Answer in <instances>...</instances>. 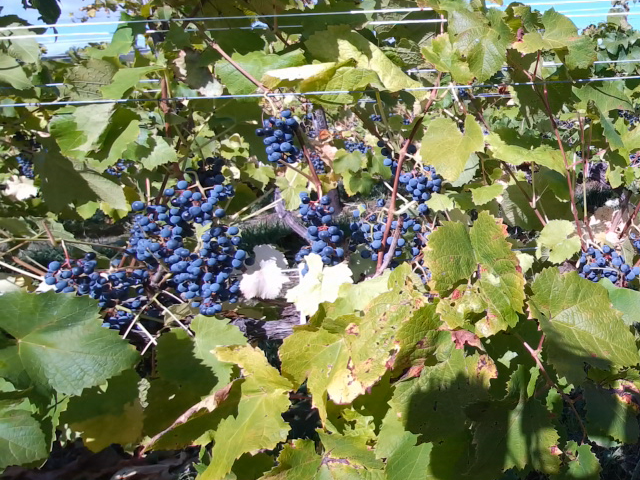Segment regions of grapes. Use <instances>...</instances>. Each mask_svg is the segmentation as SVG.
Segmentation results:
<instances>
[{"instance_id": "01657485", "label": "grapes", "mask_w": 640, "mask_h": 480, "mask_svg": "<svg viewBox=\"0 0 640 480\" xmlns=\"http://www.w3.org/2000/svg\"><path fill=\"white\" fill-rule=\"evenodd\" d=\"M207 165H212V170H204L203 161H198L199 168L196 174L199 177L201 187H212L206 190V200L194 207L190 202H200L202 193L199 188L195 192L187 191L188 183L186 180H178L175 188H166L163 191L165 198H172L176 194V190H184L180 197H174L171 205L176 208H170L168 205H149L146 217L139 214L135 217V224L130 230L133 235L129 239L132 247L125 249L124 255L135 257L137 262L146 261L149 269H155L158 266V260L166 263L168 271L173 273L166 281V285L175 288L177 293H185L187 300L195 297H201L204 302L195 301L192 304L194 309L199 308L202 315L213 317L215 313H220L223 305L218 302L210 301L213 293H218L220 301L225 303L228 299L230 304H235L240 296V282L235 280L226 288V280L233 268H241L244 263L247 266H253L255 260L252 257L246 258V251L243 248L235 249V246L242 244V238L235 236L239 229L237 227L225 226L213 227L206 230L202 235V248L199 255L191 252L187 247L183 246L182 233L184 228L179 225L181 221H194L195 223L205 227L213 222L214 204L219 200L226 201L227 197L234 195V188L230 184L222 185L224 175L222 174V166L225 165L223 158L214 159L209 156L205 159ZM215 217L223 219L226 211L222 208L214 210ZM143 232L152 233L154 236L169 239L165 242V246L161 243L153 242L149 238H145ZM204 258L208 271L201 275L202 285L200 286L197 279L200 277L201 269L199 268Z\"/></svg>"}, {"instance_id": "b958b902", "label": "grapes", "mask_w": 640, "mask_h": 480, "mask_svg": "<svg viewBox=\"0 0 640 480\" xmlns=\"http://www.w3.org/2000/svg\"><path fill=\"white\" fill-rule=\"evenodd\" d=\"M97 254L94 251H87L84 255V259H78L75 265L71 267V270H62L60 277L65 280H60L53 276V274L61 267V263L58 260H52L47 266V274L45 275L44 282L47 286H53L56 284V290L63 294H70L76 291L79 295L89 293L92 299H99L98 305L103 307L106 304V299L124 298L129 294V287L132 285L140 284L135 292L138 296H142L145 289L142 285H145L148 280V272L144 268H136L131 272V276H127L125 271H115L108 274V283L112 285L109 288L107 285V279L101 277L99 272H93L97 266Z\"/></svg>"}, {"instance_id": "0513c4c2", "label": "grapes", "mask_w": 640, "mask_h": 480, "mask_svg": "<svg viewBox=\"0 0 640 480\" xmlns=\"http://www.w3.org/2000/svg\"><path fill=\"white\" fill-rule=\"evenodd\" d=\"M299 198L301 199V203L298 204L300 208L299 214L302 216L304 222L311 221L310 226L307 228V238L312 240L313 243L312 247L309 248L307 245L301 246L299 251L295 253L294 260L301 262L304 256L313 252L315 256H320V259L325 265H338L340 263L338 257L344 256V248L337 247L333 249L331 246H328V242L338 243L340 238L344 236V231L339 229L336 224L329 225L327 231H318L316 227L321 224L331 223L332 216L335 214V208L333 206H327L324 210L323 207H320L330 205L332 203L331 197L329 195L322 196L319 200L320 206H317L315 211L313 207L309 206L311 198L307 192L301 191Z\"/></svg>"}, {"instance_id": "84f90ec7", "label": "grapes", "mask_w": 640, "mask_h": 480, "mask_svg": "<svg viewBox=\"0 0 640 480\" xmlns=\"http://www.w3.org/2000/svg\"><path fill=\"white\" fill-rule=\"evenodd\" d=\"M282 118L269 117L262 121V127L255 129V135L257 137H264L262 144L267 146L265 152L268 155L267 161L269 163H277L279 167H284L279 162L280 159L286 163H295L300 153V148L293 144V138L295 133L293 128L297 127V122L294 117H291V111L284 109L281 111Z\"/></svg>"}, {"instance_id": "f8a65327", "label": "grapes", "mask_w": 640, "mask_h": 480, "mask_svg": "<svg viewBox=\"0 0 640 480\" xmlns=\"http://www.w3.org/2000/svg\"><path fill=\"white\" fill-rule=\"evenodd\" d=\"M423 169L430 171L432 181L429 180L428 176L421 175L420 177L414 178L412 173L401 172L399 174V182L405 184L404 190L413 195L411 200L418 202L419 214L421 216H427L430 214V210L424 202L431 199V194L426 191V189L431 188L432 192H439L441 190L442 179L440 175H437V170L433 166L424 165Z\"/></svg>"}, {"instance_id": "5460f4e3", "label": "grapes", "mask_w": 640, "mask_h": 480, "mask_svg": "<svg viewBox=\"0 0 640 480\" xmlns=\"http://www.w3.org/2000/svg\"><path fill=\"white\" fill-rule=\"evenodd\" d=\"M587 254L593 255L595 262H591L589 264H584L582 270L579 272V275L582 278H586L587 274L588 279L592 280L593 283H598L599 278L596 275V271L592 270L594 267H606L607 266V255H610L611 264L620 268V273L624 275L625 281H633L640 274L639 266H630L628 263H625V259L622 255L617 254V250L615 248H611L609 245H603L600 249H595L593 246H589L587 248Z\"/></svg>"}, {"instance_id": "83cd7487", "label": "grapes", "mask_w": 640, "mask_h": 480, "mask_svg": "<svg viewBox=\"0 0 640 480\" xmlns=\"http://www.w3.org/2000/svg\"><path fill=\"white\" fill-rule=\"evenodd\" d=\"M387 216H384L382 219L383 223H386ZM376 223L373 226V242L369 241L366 238L370 237V225L368 222H364L363 220L350 222L349 230L352 231L351 237L352 240L349 244V250L351 252H355L357 250V245L364 243L368 246L369 249L375 250L381 248V237L383 234V230L385 228V224Z\"/></svg>"}, {"instance_id": "e5b3c951", "label": "grapes", "mask_w": 640, "mask_h": 480, "mask_svg": "<svg viewBox=\"0 0 640 480\" xmlns=\"http://www.w3.org/2000/svg\"><path fill=\"white\" fill-rule=\"evenodd\" d=\"M133 319V314L130 311L119 310L117 312V316H110L108 321H104L102 326L104 328H110L114 330H118L120 325H124L126 322H129Z\"/></svg>"}, {"instance_id": "2adb6a1f", "label": "grapes", "mask_w": 640, "mask_h": 480, "mask_svg": "<svg viewBox=\"0 0 640 480\" xmlns=\"http://www.w3.org/2000/svg\"><path fill=\"white\" fill-rule=\"evenodd\" d=\"M377 146L381 149V154L383 156H386L387 159L383 160V166L384 167H391V176L394 177V169L395 166L397 164V161H394L392 155H391V148L390 147H384L385 143L383 141H378L377 142Z\"/></svg>"}, {"instance_id": "ef6de9ee", "label": "grapes", "mask_w": 640, "mask_h": 480, "mask_svg": "<svg viewBox=\"0 0 640 480\" xmlns=\"http://www.w3.org/2000/svg\"><path fill=\"white\" fill-rule=\"evenodd\" d=\"M403 224L401 226V234L405 235L407 233V230L409 229V227H412V230L414 232H419L421 230V225L419 222H417L416 219H410V215L409 214H405L403 216Z\"/></svg>"}, {"instance_id": "1ff8f66d", "label": "grapes", "mask_w": 640, "mask_h": 480, "mask_svg": "<svg viewBox=\"0 0 640 480\" xmlns=\"http://www.w3.org/2000/svg\"><path fill=\"white\" fill-rule=\"evenodd\" d=\"M360 256L362 259H370L372 262H376L378 257V252L374 251L371 253L370 250H362L360 252Z\"/></svg>"}, {"instance_id": "54f908b8", "label": "grapes", "mask_w": 640, "mask_h": 480, "mask_svg": "<svg viewBox=\"0 0 640 480\" xmlns=\"http://www.w3.org/2000/svg\"><path fill=\"white\" fill-rule=\"evenodd\" d=\"M407 244V241L404 238H398L397 242H396V246L398 248L395 249L394 251V256L396 258H400L402 256V247H404Z\"/></svg>"}, {"instance_id": "91a60905", "label": "grapes", "mask_w": 640, "mask_h": 480, "mask_svg": "<svg viewBox=\"0 0 640 480\" xmlns=\"http://www.w3.org/2000/svg\"><path fill=\"white\" fill-rule=\"evenodd\" d=\"M419 253H420V250H419L416 246L411 247V249H410V255H411V256H413V257H412L411 259H408V262H413V261H415L416 256H418V255H419Z\"/></svg>"}]
</instances>
